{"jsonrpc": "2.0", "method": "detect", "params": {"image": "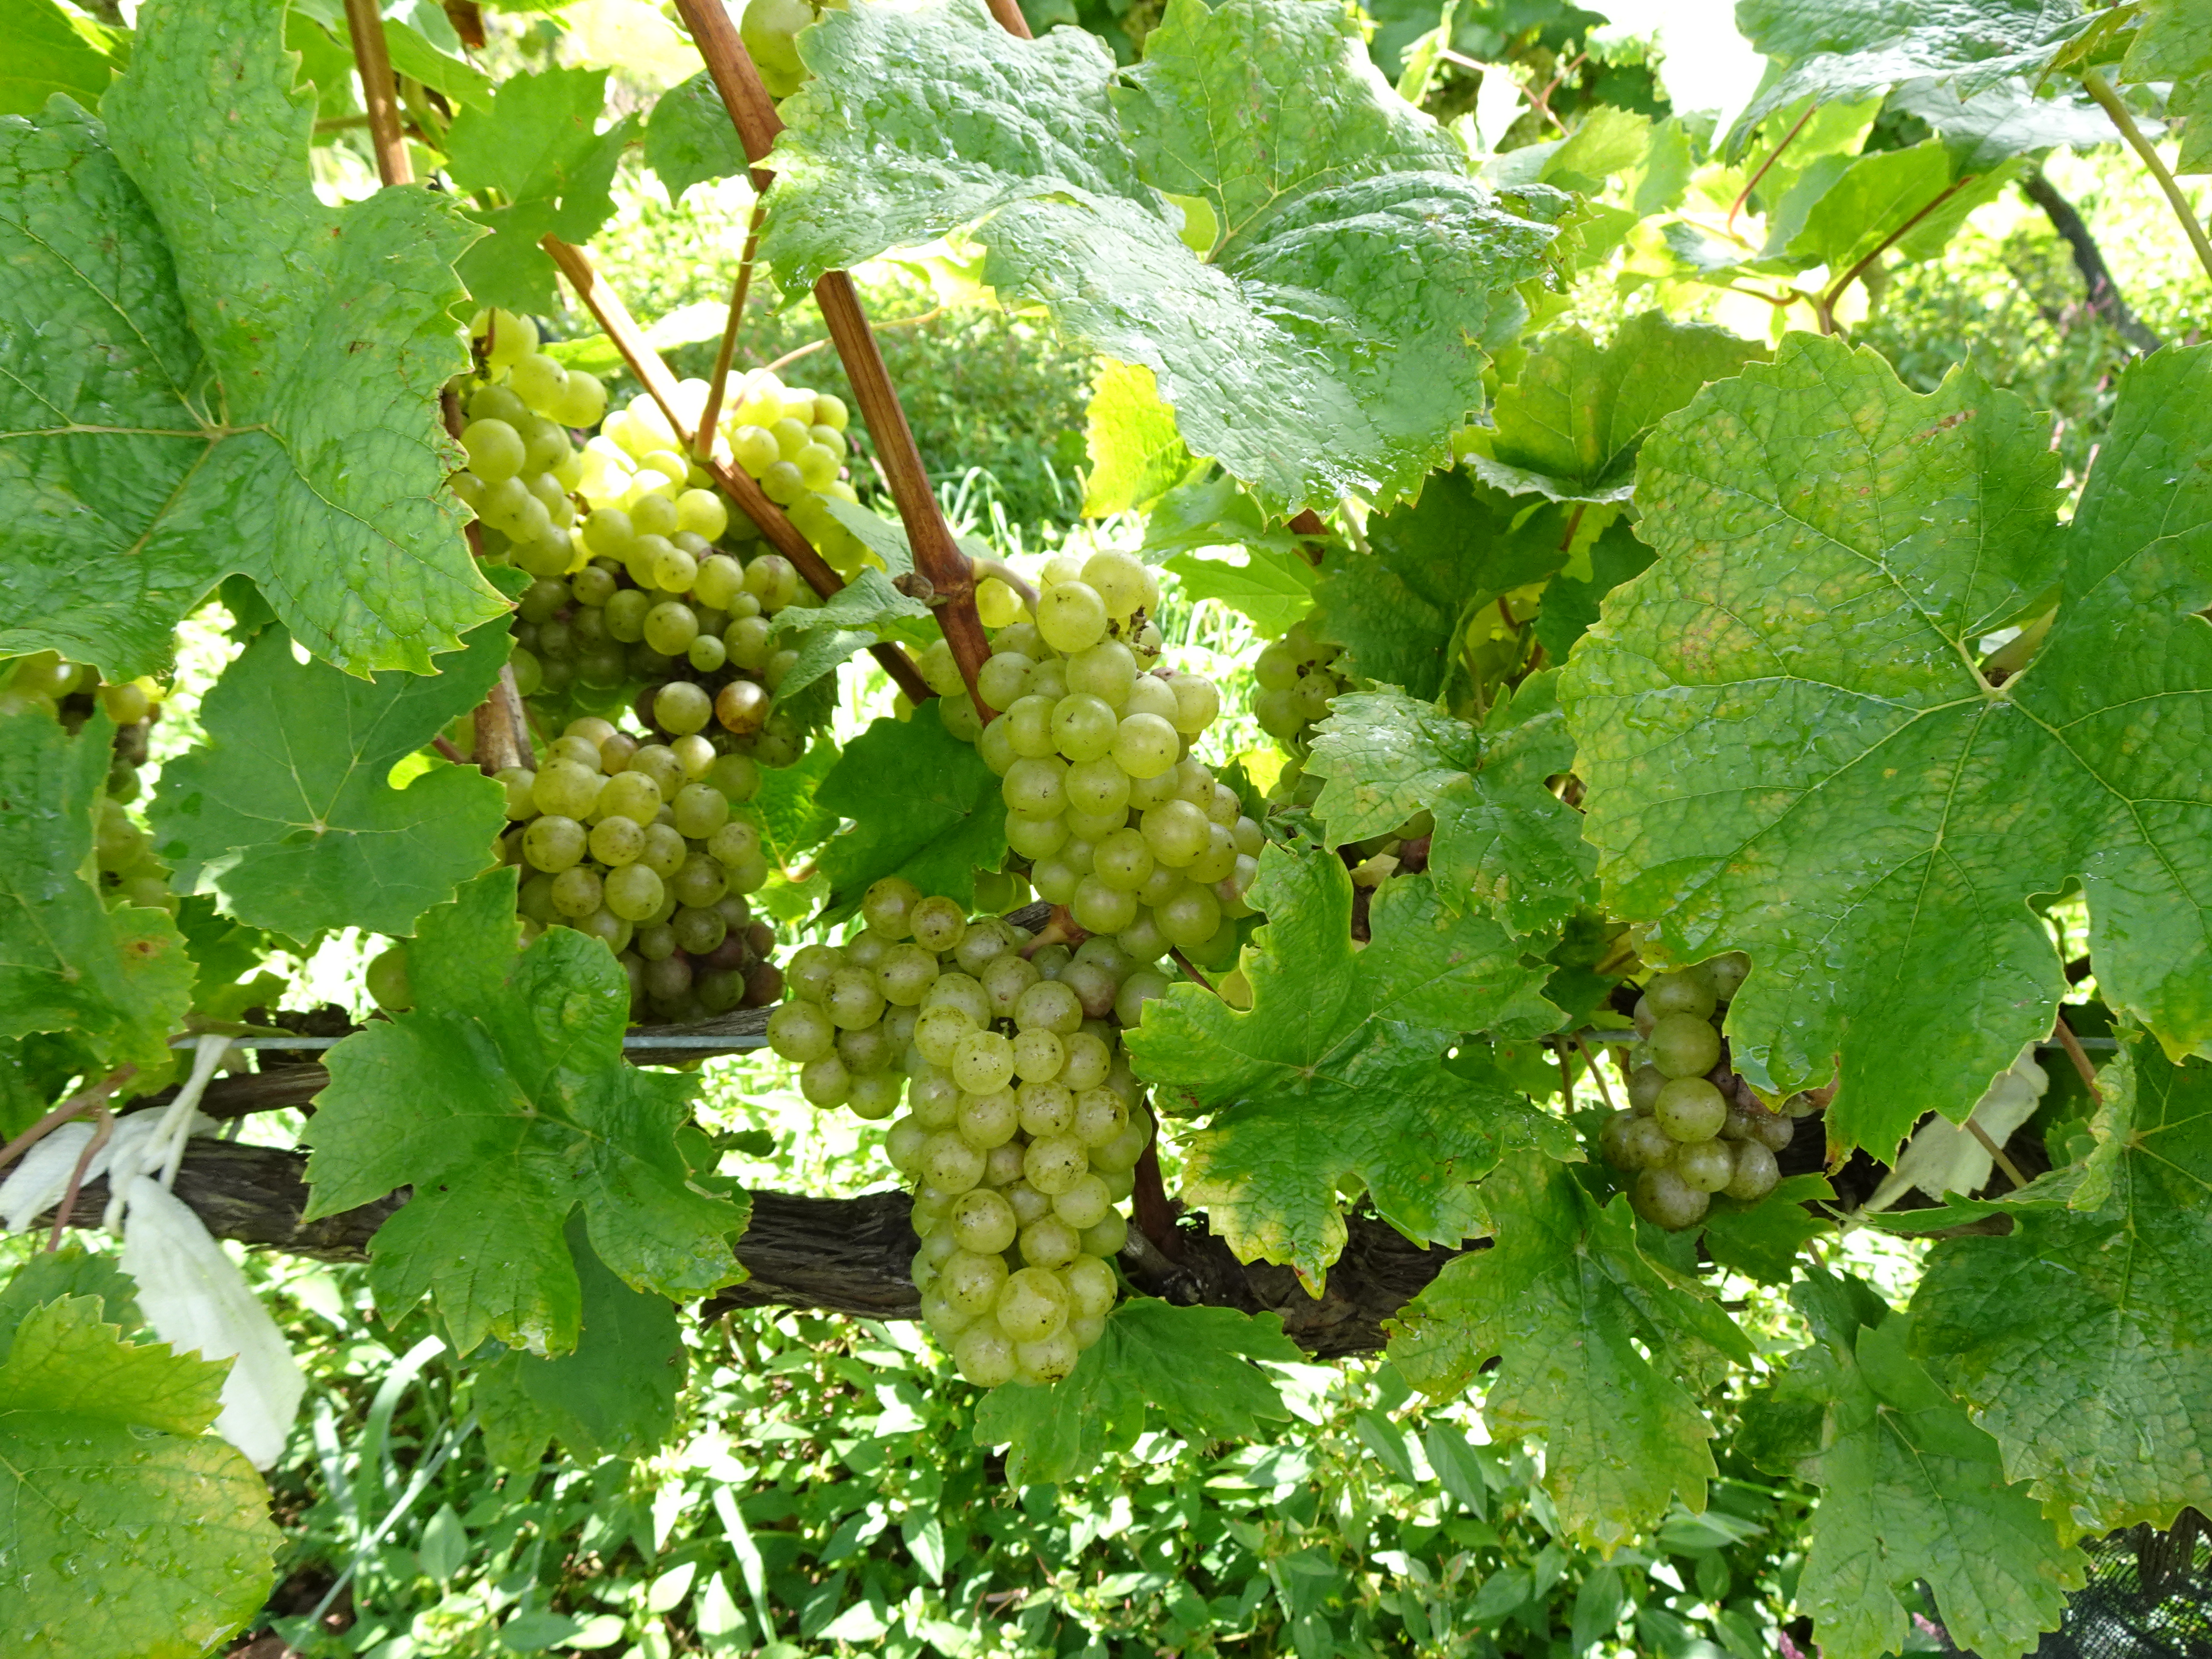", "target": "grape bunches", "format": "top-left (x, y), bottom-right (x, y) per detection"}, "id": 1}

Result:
top-left (1215, 969), bottom-right (1256, 1011)
top-left (572, 487), bottom-right (836, 761)
top-left (0, 640), bottom-right (158, 804)
top-left (921, 550), bottom-right (1265, 970)
top-left (368, 941), bottom-right (413, 1011)
top-left (765, 876), bottom-right (1173, 1385)
top-left (573, 370), bottom-right (890, 586)
top-left (1598, 951), bottom-right (1818, 1229)
top-left (94, 799), bottom-right (181, 922)
top-left (490, 716), bottom-right (782, 1022)
top-left (442, 305), bottom-right (609, 577)
top-left (1252, 622), bottom-right (1361, 806)
top-left (502, 567), bottom-right (632, 746)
